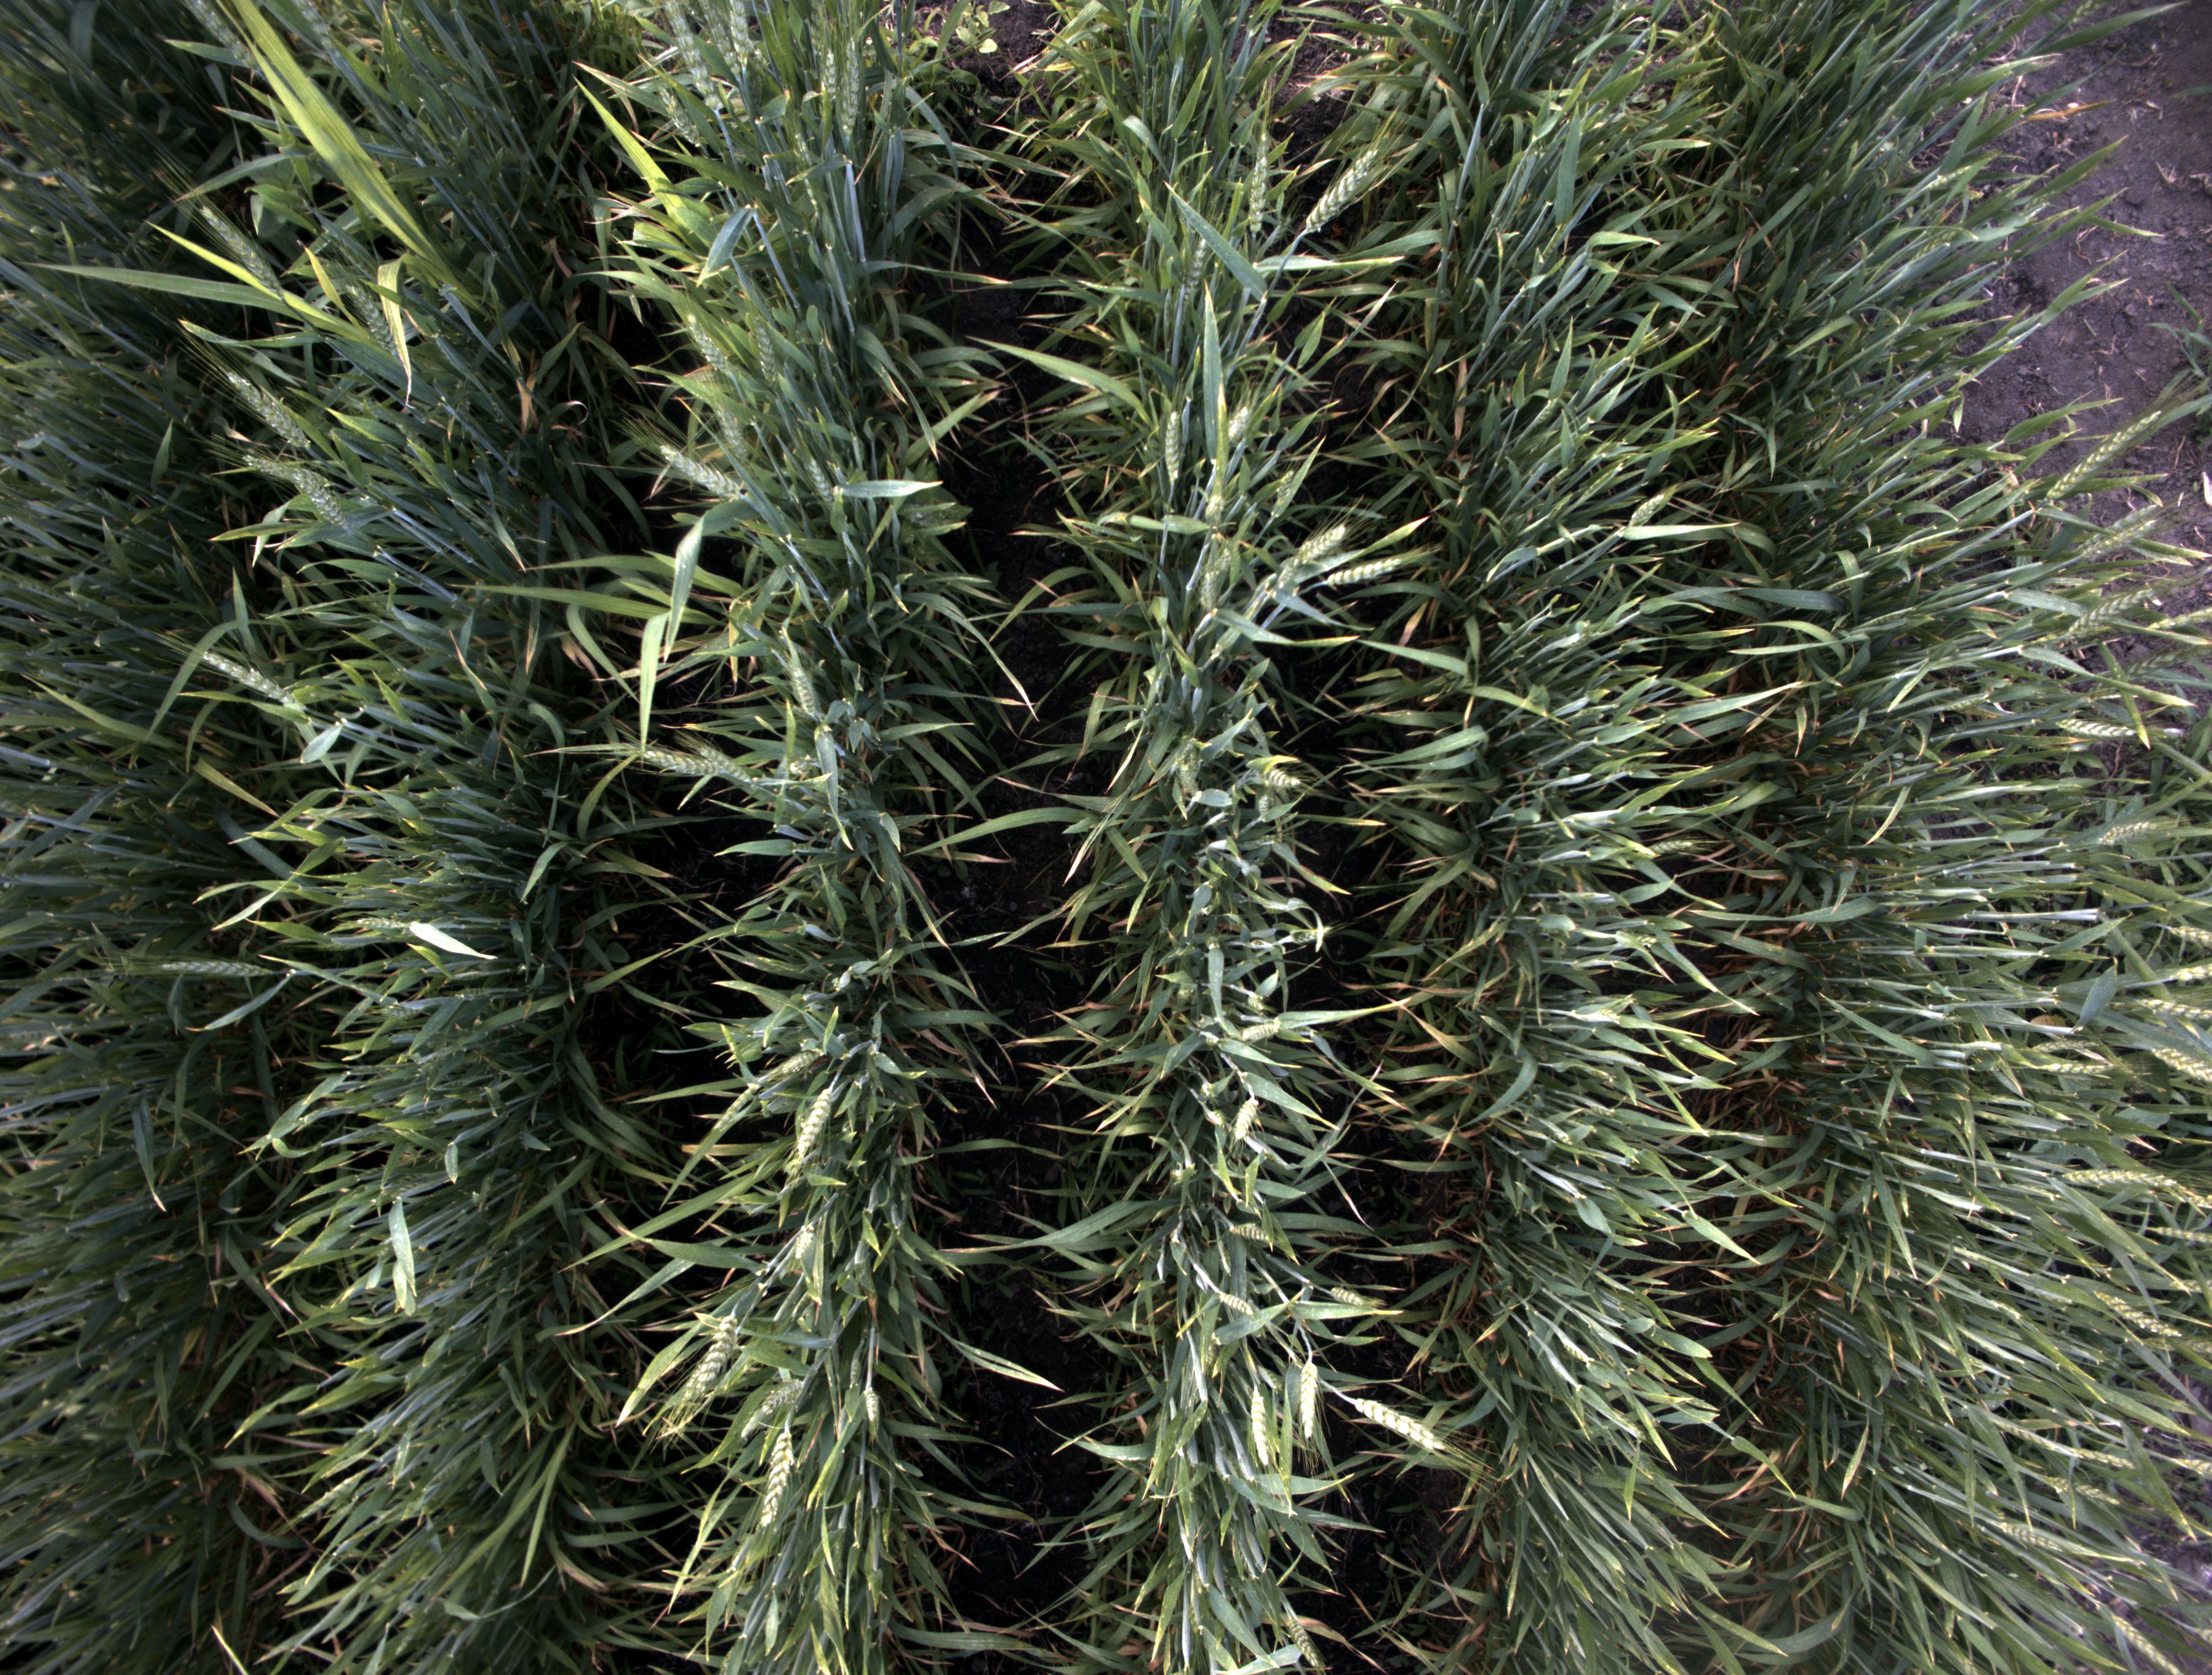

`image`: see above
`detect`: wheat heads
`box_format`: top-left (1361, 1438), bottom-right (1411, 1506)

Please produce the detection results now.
top-left (5, 1030), bottom-right (48, 1044)
top-left (415, 1288), bottom-right (439, 1303)
top-left (1278, 468), bottom-right (1295, 498)
top-left (1630, 495), bottom-right (1664, 525)
top-left (840, 37), bottom-right (859, 139)
top-left (2072, 504), bottom-right (2158, 554)
top-left (1204, 492), bottom-right (1224, 520)
top-left (2070, 1447), bottom-right (2136, 1470)
top-left (746, 37), bottom-right (769, 70)
top-left (2171, 965), bottom-right (2212, 981)
top-left (713, 1084), bottom-right (755, 1130)
top-left (658, 443), bottom-right (740, 498)
top-left (1288, 1615), bottom-right (1320, 1668)
top-left (2183, 1333), bottom-right (2210, 1355)
top-left (1204, 1035), bottom-right (1218, 1044)
top-left (2154, 1223), bottom-right (2211, 1245)
top-left (1206, 1344), bottom-right (1214, 1364)
top-left (321, 942), bottom-right (359, 950)
top-left (781, 1049), bottom-right (824, 1075)
top-left (1329, 1286), bottom-right (1364, 1305)
top-left (1190, 749), bottom-right (1201, 777)
top-left (2099, 820), bottom-right (2158, 847)
top-left (1233, 1098), bottom-right (1259, 1140)
top-left (0, 1294), bottom-right (57, 1319)
top-left (1184, 237), bottom-right (1207, 300)
top-left (1181, 745), bottom-right (1190, 761)
top-left (182, 1), bottom-right (260, 70)
top-left (1250, 1390), bottom-right (1270, 1466)
top-left (445, 1081), bottom-right (468, 1089)
top-left (1211, 1107), bottom-right (1224, 1123)
top-left (29, 661), bottom-right (84, 685)
top-left (696, 744), bottom-right (752, 785)
top-left (820, 48), bottom-right (837, 102)
top-left (2177, 1456), bottom-right (2211, 1474)
top-left (1305, 148), bottom-right (1378, 233)
top-left (15, 579), bottom-right (64, 600)
top-left (1228, 405), bottom-right (1249, 444)
top-left (1293, 927), bottom-right (1332, 944)
top-left (662, 1), bottom-right (721, 111)
top-left (1554, 1132), bottom-right (1573, 1145)
top-left (715, 402), bottom-right (748, 463)
top-left (1194, 1562), bottom-right (1202, 1593)
top-left (1209, 934), bottom-right (1219, 943)
top-left (291, 1), bottom-right (334, 49)
top-left (2150, 1044), bottom-right (2211, 1084)
top-left (15, 0), bottom-right (60, 46)
top-left (1598, 1008), bottom-right (1619, 1022)
top-left (395, 1464), bottom-right (421, 1484)
top-left (458, 863), bottom-right (481, 875)
top-left (1543, 239), bottom-right (1559, 262)
top-left (643, 749), bottom-right (725, 777)
top-left (2026, 1082), bottom-right (2076, 1098)
top-left (864, 1391), bottom-right (879, 1422)
top-left (198, 204), bottom-right (284, 298)
top-left (1535, 397), bottom-right (1558, 427)
top-left (389, 1183), bottom-right (424, 1198)
top-left (754, 315), bottom-right (778, 386)
top-left (354, 1477), bottom-right (380, 1498)
top-left (1234, 1224), bottom-right (1269, 1241)
top-left (795, 1087), bottom-right (833, 1156)
top-left (394, 1619), bottom-right (421, 1656)
top-left (2196, 1194), bottom-right (2211, 1208)
top-left (1587, 1068), bottom-right (1606, 1079)
top-left (0, 383), bottom-right (31, 409)
top-left (159, 960), bottom-right (275, 977)
top-left (1327, 558), bottom-right (1404, 587)
top-left (2171, 1275), bottom-right (2211, 1294)
top-left (1248, 994), bottom-right (1264, 1011)
top-left (809, 454), bottom-right (835, 502)
top-left (301, 1471), bottom-right (361, 1518)
top-left (1273, 217), bottom-right (1291, 244)
top-left (790, 755), bottom-right (813, 774)
top-left (2087, 653), bottom-right (2174, 697)
top-left (1633, 935), bottom-right (1656, 943)
top-left (791, 666), bottom-right (817, 716)
top-left (1181, 763), bottom-right (1201, 798)
top-left (1276, 560), bottom-right (1297, 586)
top-left (291, 466), bottom-right (349, 526)
top-left (2112, 1614), bottom-right (2181, 1674)
top-left (356, 917), bottom-right (407, 930)
top-left (2056, 718), bottom-right (2138, 738)
top-left (1925, 166), bottom-right (1971, 191)
top-left (340, 1430), bottom-right (366, 1450)
top-left (1289, 1026), bottom-right (1312, 1036)
top-left (2015, 1183), bottom-right (2054, 1197)
top-left (794, 129), bottom-right (812, 164)
top-left (2046, 1062), bottom-right (2107, 1074)
top-left (2000, 1522), bottom-right (2062, 1553)
top-left (2043, 410), bottom-right (2161, 502)
top-left (760, 1378), bottom-right (805, 1414)
top-left (2029, 1040), bottom-right (2100, 1053)
top-left (658, 85), bottom-right (700, 144)
top-left (758, 1432), bottom-right (794, 1528)
top-left (795, 1230), bottom-right (813, 1259)
top-left (370, 599), bottom-right (398, 618)
top-left (2147, 606), bottom-right (2211, 627)
top-left (1249, 132), bottom-right (1268, 232)
top-left (1300, 1360), bottom-right (1319, 1439)
top-left (1242, 1024), bottom-right (1277, 1041)
top-left (385, 956), bottom-right (417, 965)
top-left (1583, 473), bottom-right (1609, 497)
top-left (1200, 1081), bottom-right (1212, 1099)
top-left (380, 1006), bottom-right (421, 1022)
top-left (728, 0), bottom-right (749, 66)
top-left (1220, 547), bottom-right (1233, 574)
top-left (1956, 1654), bottom-right (1979, 1674)
top-left (456, 974), bottom-right (481, 981)
top-left (2194, 1626), bottom-right (2211, 1641)
top-left (2081, 520), bottom-right (2156, 559)
top-left (2093, 1288), bottom-right (2181, 1336)
top-left (1544, 467), bottom-right (1573, 489)
top-left (695, 1314), bottom-right (740, 1394)
top-left (2043, 1475), bottom-right (2121, 1507)
top-left (0, 978), bottom-right (43, 988)
top-left (1616, 1410), bottom-right (1646, 1442)
top-left (1354, 1397), bottom-right (1446, 1450)
top-left (2067, 586), bottom-right (2154, 634)
top-left (395, 421), bottom-right (429, 451)
top-left (376, 1236), bottom-right (392, 1258)
top-left (834, 1534), bottom-right (845, 1561)
top-left (1944, 698), bottom-right (1984, 711)
top-left (1257, 794), bottom-right (1269, 817)
top-left (0, 796), bottom-right (29, 816)
top-left (1872, 613), bottom-right (1902, 625)
top-left (2060, 1168), bottom-right (2179, 1187)
top-left (428, 1059), bottom-right (438, 1072)
top-left (1246, 1385), bottom-right (1253, 1397)
top-left (2020, 1131), bottom-right (2065, 1139)
top-left (338, 247), bottom-right (373, 275)
top-left (2169, 921), bottom-right (2211, 945)
top-left (1593, 441), bottom-right (1611, 454)
top-left (198, 649), bottom-right (296, 704)
top-left (1176, 988), bottom-right (1192, 999)
top-left (790, 703), bottom-right (816, 720)
top-left (1911, 230), bottom-right (1956, 261)
top-left (850, 1356), bottom-right (863, 1384)
top-left (2067, 627), bottom-right (2111, 641)
top-left (456, 987), bottom-right (489, 998)
top-left (746, 67), bottom-right (762, 106)
top-left (1261, 833), bottom-right (1276, 842)
top-left (57, 968), bottom-right (114, 980)
top-left (1647, 840), bottom-right (1693, 852)
top-left (1218, 1290), bottom-right (1254, 1316)
top-left (2003, 1424), bottom-right (2056, 1450)
top-left (686, 312), bottom-right (728, 371)
top-left (1626, 1452), bottom-right (1651, 1477)
top-left (1590, 1104), bottom-right (1612, 1118)
top-left (2028, 1286), bottom-right (2066, 1305)
top-left (360, 1166), bottom-right (384, 1178)
top-left (393, 1173), bottom-right (427, 1186)
top-left (225, 369), bottom-right (310, 449)
top-left (242, 454), bottom-right (330, 488)
top-left (1189, 1598), bottom-right (1200, 1635)
top-left (1561, 1342), bottom-right (1584, 1361)
top-left (346, 1063), bottom-right (389, 1074)
top-left (857, 438), bottom-right (864, 462)
top-left (1263, 765), bottom-right (1302, 788)
top-left (1296, 523), bottom-right (1346, 562)
top-left (686, 1355), bottom-right (708, 1388)
top-left (1567, 633), bottom-right (1594, 648)
top-left (1897, 125), bottom-right (1923, 163)
top-left (2021, 190), bottom-right (2059, 210)
top-left (795, 842), bottom-right (813, 851)
top-left (1830, 578), bottom-right (1858, 592)
top-left (1238, 1543), bottom-right (1251, 1572)
top-left (803, 178), bottom-right (816, 200)
top-left (1264, 1368), bottom-right (1283, 1390)
top-left (2135, 993), bottom-right (2211, 1024)
top-left (1199, 571), bottom-right (1218, 609)
top-left (1607, 761), bottom-right (1642, 776)
top-left (699, 0), bottom-right (741, 75)
top-left (2148, 1334), bottom-right (2176, 1352)
top-left (1910, 537), bottom-right (1942, 549)
top-left (1164, 410), bottom-right (1181, 481)
top-left (810, 3), bottom-right (827, 55)
top-left (2067, 1), bottom-right (2112, 27)
top-left (432, 1464), bottom-right (456, 1484)
top-left (1171, 1167), bottom-right (1184, 1180)
top-left (344, 283), bottom-right (397, 353)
